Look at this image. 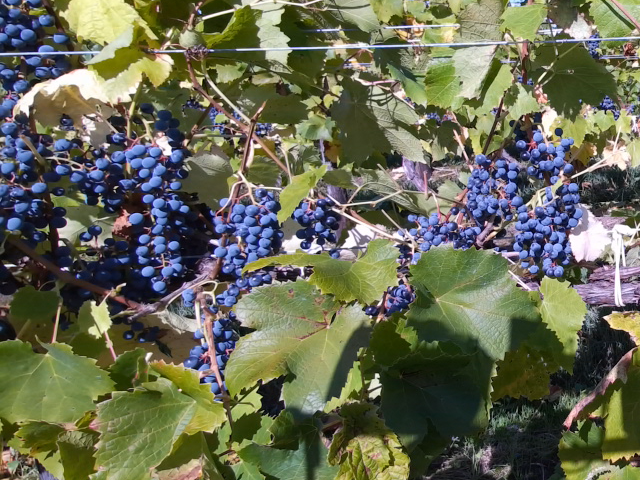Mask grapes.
<instances>
[{
	"label": "grapes",
	"mask_w": 640,
	"mask_h": 480,
	"mask_svg": "<svg viewBox=\"0 0 640 480\" xmlns=\"http://www.w3.org/2000/svg\"><path fill=\"white\" fill-rule=\"evenodd\" d=\"M5 5H0V52L30 51L37 42V33L40 27H53L56 18L52 14H40L25 17L19 9H10L7 6H21L24 0H3Z\"/></svg>",
	"instance_id": "grapes-6"
},
{
	"label": "grapes",
	"mask_w": 640,
	"mask_h": 480,
	"mask_svg": "<svg viewBox=\"0 0 640 480\" xmlns=\"http://www.w3.org/2000/svg\"><path fill=\"white\" fill-rule=\"evenodd\" d=\"M521 268L523 270H528L529 269V273L531 275H536L540 272V266L538 264H533L530 266V263L528 261H523L521 263Z\"/></svg>",
	"instance_id": "grapes-18"
},
{
	"label": "grapes",
	"mask_w": 640,
	"mask_h": 480,
	"mask_svg": "<svg viewBox=\"0 0 640 480\" xmlns=\"http://www.w3.org/2000/svg\"><path fill=\"white\" fill-rule=\"evenodd\" d=\"M475 163L482 167L473 168L466 178L467 205L461 210L457 206L449 209V215L455 217L459 212L468 217H473L475 226L459 228L456 222L446 221L443 226L437 213H432L428 218L426 215L417 216L409 214L407 221L411 224H418L419 228H411L409 234L414 241L423 236V241L419 243V248L423 252H428L433 246L438 247L448 240L453 243L455 249L468 250L475 242L484 222L493 214L496 216L492 220L495 227L500 225L503 219L509 222L513 219L510 207L516 209L518 222L514 224L516 231L520 233L515 236L512 250L519 253L521 259L541 258V270L549 278H561L564 275V267L572 261V247L568 239L567 231L578 225V221L583 217L581 209H575V204L581 201V193L577 183L562 185L556 190L559 197L553 201L552 187H545V197L543 203L548 204L545 208L537 206L535 216L531 219L528 213L529 206L524 204V198L517 196V184L515 178L518 176L519 165L516 162H509L506 158H497L494 161L496 168L489 176L486 166L492 164V160L483 153L475 156ZM499 179L505 180L508 184L503 187V194L507 198L497 199L490 194L491 189L499 187Z\"/></svg>",
	"instance_id": "grapes-2"
},
{
	"label": "grapes",
	"mask_w": 640,
	"mask_h": 480,
	"mask_svg": "<svg viewBox=\"0 0 640 480\" xmlns=\"http://www.w3.org/2000/svg\"><path fill=\"white\" fill-rule=\"evenodd\" d=\"M155 129L165 133L170 139L168 148L171 150L165 164L158 162L163 156L160 147L151 144L136 145L128 151H113L109 160L105 157V150L98 148L93 151L96 159H84L80 155L74 157V161L86 168L96 169L71 171L68 165L57 164L51 172H44L42 179L51 183H59L61 177H67L71 183H78V190L84 196V203L88 206L98 204V194H101V205L108 214H115L117 206L124 203L126 190H134L139 186L141 203L149 205V214L157 219L155 225L149 229V233H140L137 236V244L129 254L118 256L113 253V247L117 250H125L127 243L117 241L115 238H107L101 249L106 258L101 266L98 262L89 263L84 271H78L74 278L85 280L107 290H114L121 280V274L117 271L110 273L107 268L129 265H147L140 269H133L131 276L136 286L148 285L155 294H164L167 291L168 277L177 278L183 271L180 236H191L194 228L186 225L185 220L195 221L198 213L189 209L188 204L171 192L178 191L182 187L179 179H186L189 171L183 168V160L190 156V151L181 143L185 134L177 128L180 121L172 118L169 110H159L156 113ZM129 163L132 171H137V176L125 179L122 174L124 165ZM167 259L158 275L153 266L163 263L162 254Z\"/></svg>",
	"instance_id": "grapes-1"
},
{
	"label": "grapes",
	"mask_w": 640,
	"mask_h": 480,
	"mask_svg": "<svg viewBox=\"0 0 640 480\" xmlns=\"http://www.w3.org/2000/svg\"><path fill=\"white\" fill-rule=\"evenodd\" d=\"M16 122H2L0 132L5 136V147L2 149V156L7 159H17L18 166L12 161L0 164V172L6 180L19 183L20 186L12 187L5 184L0 187V208L12 209L9 212L0 213V226L6 224V228L11 231H18L28 238L26 244L35 249L38 242H45L47 234L43 229L49 225V220L42 212L43 201L40 198H29L22 187H26L28 182L36 181L38 174L33 165V152L28 149V144L20 139L19 133L36 149L39 156L51 157L53 150L49 148L53 144L50 134H37L31 132L27 127L29 119L22 113L14 115Z\"/></svg>",
	"instance_id": "grapes-4"
},
{
	"label": "grapes",
	"mask_w": 640,
	"mask_h": 480,
	"mask_svg": "<svg viewBox=\"0 0 640 480\" xmlns=\"http://www.w3.org/2000/svg\"><path fill=\"white\" fill-rule=\"evenodd\" d=\"M25 64L33 67L37 78H46L49 75L60 77L63 72L71 69V62L65 61L66 55L49 57H24Z\"/></svg>",
	"instance_id": "grapes-9"
},
{
	"label": "grapes",
	"mask_w": 640,
	"mask_h": 480,
	"mask_svg": "<svg viewBox=\"0 0 640 480\" xmlns=\"http://www.w3.org/2000/svg\"><path fill=\"white\" fill-rule=\"evenodd\" d=\"M255 197L261 199L258 206L235 203L229 222L225 221L227 212L224 216H217L213 209L208 211L216 235L226 232L231 238H240V241L246 244L242 247L239 243H230V239L226 238L224 246L222 238L218 237L219 245L212 249L215 258H223L220 271L236 278L235 285H230L227 291L216 296V303L227 308L237 304L236 297L241 294L242 288L249 289L272 283L270 274H251L241 279L242 269L260 257H267L271 249H279L284 237V232L279 229L276 213L282 209V204L274 200L275 194L267 192L265 188H257Z\"/></svg>",
	"instance_id": "grapes-3"
},
{
	"label": "grapes",
	"mask_w": 640,
	"mask_h": 480,
	"mask_svg": "<svg viewBox=\"0 0 640 480\" xmlns=\"http://www.w3.org/2000/svg\"><path fill=\"white\" fill-rule=\"evenodd\" d=\"M533 141L537 144L530 152V141L527 139L528 134L521 130V123L516 125L514 130L515 136V149L518 152H522L520 158L523 162H530L532 165L526 169V174L529 177H534L536 180H543L546 177V171L550 172L549 182L556 185L560 180V170L565 174H572L574 172V166L571 163L564 162L566 153L570 150V146L574 143L572 138H562L560 145L556 146L554 143L547 145L543 142L542 131L538 129L537 125H532Z\"/></svg>",
	"instance_id": "grapes-5"
},
{
	"label": "grapes",
	"mask_w": 640,
	"mask_h": 480,
	"mask_svg": "<svg viewBox=\"0 0 640 480\" xmlns=\"http://www.w3.org/2000/svg\"><path fill=\"white\" fill-rule=\"evenodd\" d=\"M20 64H16L14 69H9L5 63H0V80L3 81V87L6 92L25 93L29 89V80L17 78L19 74Z\"/></svg>",
	"instance_id": "grapes-11"
},
{
	"label": "grapes",
	"mask_w": 640,
	"mask_h": 480,
	"mask_svg": "<svg viewBox=\"0 0 640 480\" xmlns=\"http://www.w3.org/2000/svg\"><path fill=\"white\" fill-rule=\"evenodd\" d=\"M341 249L340 248H331L328 250V255L331 256L334 259H339L341 256Z\"/></svg>",
	"instance_id": "grapes-19"
},
{
	"label": "grapes",
	"mask_w": 640,
	"mask_h": 480,
	"mask_svg": "<svg viewBox=\"0 0 640 480\" xmlns=\"http://www.w3.org/2000/svg\"><path fill=\"white\" fill-rule=\"evenodd\" d=\"M317 208L314 211H309L310 204L308 202H300L290 214V218L293 221H298V224L303 229H297L294 232L296 239H305L299 242V247L303 250H307L311 247V243H315L322 246L328 242L337 243L338 236L327 229V225L332 231H338L340 229L339 221L342 216L333 211L328 210L326 206H334L335 202L328 197L320 198L315 201Z\"/></svg>",
	"instance_id": "grapes-7"
},
{
	"label": "grapes",
	"mask_w": 640,
	"mask_h": 480,
	"mask_svg": "<svg viewBox=\"0 0 640 480\" xmlns=\"http://www.w3.org/2000/svg\"><path fill=\"white\" fill-rule=\"evenodd\" d=\"M397 249H400V255L399 258L400 259H410L413 262H418L421 258H422V253L421 252H414L412 255L410 254L412 252V248L406 245H402V244H397L396 245Z\"/></svg>",
	"instance_id": "grapes-13"
},
{
	"label": "grapes",
	"mask_w": 640,
	"mask_h": 480,
	"mask_svg": "<svg viewBox=\"0 0 640 480\" xmlns=\"http://www.w3.org/2000/svg\"><path fill=\"white\" fill-rule=\"evenodd\" d=\"M181 297L183 299V306L186 308H192L194 306L193 300L196 299V293L191 288H186L185 291L181 292Z\"/></svg>",
	"instance_id": "grapes-16"
},
{
	"label": "grapes",
	"mask_w": 640,
	"mask_h": 480,
	"mask_svg": "<svg viewBox=\"0 0 640 480\" xmlns=\"http://www.w3.org/2000/svg\"><path fill=\"white\" fill-rule=\"evenodd\" d=\"M203 383L204 384H212L211 385V392L216 395L215 397H213L214 401H221V397H222V393L221 390L219 389V382L214 378V375L212 373H210L208 376L203 378Z\"/></svg>",
	"instance_id": "grapes-14"
},
{
	"label": "grapes",
	"mask_w": 640,
	"mask_h": 480,
	"mask_svg": "<svg viewBox=\"0 0 640 480\" xmlns=\"http://www.w3.org/2000/svg\"><path fill=\"white\" fill-rule=\"evenodd\" d=\"M205 352H207L206 342L201 346H194L190 350V358H186L183 361V366L191 369H197L199 372L210 370V363L206 362L205 359H202Z\"/></svg>",
	"instance_id": "grapes-12"
},
{
	"label": "grapes",
	"mask_w": 640,
	"mask_h": 480,
	"mask_svg": "<svg viewBox=\"0 0 640 480\" xmlns=\"http://www.w3.org/2000/svg\"><path fill=\"white\" fill-rule=\"evenodd\" d=\"M398 284L399 286H395L389 291L390 296L386 299L387 307L385 308V313L387 315H392L396 311H403L404 307L408 306V303H412L416 299V295L404 284L403 280H399Z\"/></svg>",
	"instance_id": "grapes-10"
},
{
	"label": "grapes",
	"mask_w": 640,
	"mask_h": 480,
	"mask_svg": "<svg viewBox=\"0 0 640 480\" xmlns=\"http://www.w3.org/2000/svg\"><path fill=\"white\" fill-rule=\"evenodd\" d=\"M59 255L62 257L58 260V264L61 267H70L73 263V258L70 255V249L67 246H59L57 248Z\"/></svg>",
	"instance_id": "grapes-15"
},
{
	"label": "grapes",
	"mask_w": 640,
	"mask_h": 480,
	"mask_svg": "<svg viewBox=\"0 0 640 480\" xmlns=\"http://www.w3.org/2000/svg\"><path fill=\"white\" fill-rule=\"evenodd\" d=\"M237 318V315L234 314L233 310H230L228 312V317L224 318V319H219L218 321L214 322V327H213V336L215 338H221L222 342H217L216 343V350H215V354H216V358H217V362H218V369L221 373V375L224 374V367L225 364L228 362L229 360V356L227 355L226 350L227 349H235L236 348V343L234 340H231L233 338V331L232 330H224L225 329V324L226 323H230L235 322Z\"/></svg>",
	"instance_id": "grapes-8"
},
{
	"label": "grapes",
	"mask_w": 640,
	"mask_h": 480,
	"mask_svg": "<svg viewBox=\"0 0 640 480\" xmlns=\"http://www.w3.org/2000/svg\"><path fill=\"white\" fill-rule=\"evenodd\" d=\"M159 331L157 326H152L146 330V332H141L137 335V340L141 343L151 342L155 338V334Z\"/></svg>",
	"instance_id": "grapes-17"
}]
</instances>
